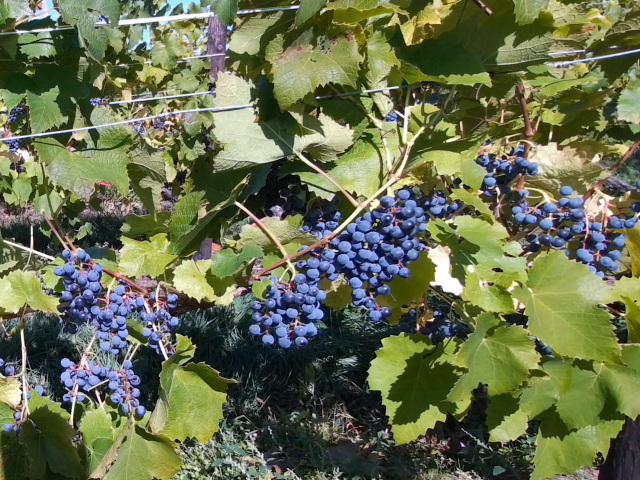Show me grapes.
<instances>
[{"label":"grapes","mask_w":640,"mask_h":480,"mask_svg":"<svg viewBox=\"0 0 640 480\" xmlns=\"http://www.w3.org/2000/svg\"><path fill=\"white\" fill-rule=\"evenodd\" d=\"M60 365L65 370L60 374V379L63 381L62 387L64 389H71L74 386V381L79 387H82L84 391L90 390L94 385L101 382V378L109 380L107 388L112 390L110 394V402L112 404H120L121 409L125 414L130 412L128 404L125 402L126 391L122 387L124 381L119 379L117 372H112V369L108 366H100L92 361L87 363L88 369L91 371L88 373L84 368L75 370V363L68 357H62L60 359Z\"/></svg>","instance_id":"84f90ec7"},{"label":"grapes","mask_w":640,"mask_h":480,"mask_svg":"<svg viewBox=\"0 0 640 480\" xmlns=\"http://www.w3.org/2000/svg\"><path fill=\"white\" fill-rule=\"evenodd\" d=\"M589 239L594 243V249L601 251L598 253L599 265L603 268H607L609 271H617L618 263L616 260L622 258V253L619 249L609 250L610 244L605 243L607 241V235L601 233L603 224L601 222L591 223L588 222Z\"/></svg>","instance_id":"83cd7487"},{"label":"grapes","mask_w":640,"mask_h":480,"mask_svg":"<svg viewBox=\"0 0 640 480\" xmlns=\"http://www.w3.org/2000/svg\"><path fill=\"white\" fill-rule=\"evenodd\" d=\"M460 329L459 323H454L453 325H441L437 327L436 335H443L444 337H451L458 333Z\"/></svg>","instance_id":"91a60905"},{"label":"grapes","mask_w":640,"mask_h":480,"mask_svg":"<svg viewBox=\"0 0 640 480\" xmlns=\"http://www.w3.org/2000/svg\"><path fill=\"white\" fill-rule=\"evenodd\" d=\"M13 428L16 434H20L22 432L21 426L19 424H16L15 426L10 422H5L3 424V431L5 433H10L13 430Z\"/></svg>","instance_id":"dcf779d0"},{"label":"grapes","mask_w":640,"mask_h":480,"mask_svg":"<svg viewBox=\"0 0 640 480\" xmlns=\"http://www.w3.org/2000/svg\"><path fill=\"white\" fill-rule=\"evenodd\" d=\"M142 335L146 338H150V347L155 350L158 355H162L163 351L159 348L158 341L160 340V333L153 331L152 328H144Z\"/></svg>","instance_id":"54f908b8"},{"label":"grapes","mask_w":640,"mask_h":480,"mask_svg":"<svg viewBox=\"0 0 640 480\" xmlns=\"http://www.w3.org/2000/svg\"><path fill=\"white\" fill-rule=\"evenodd\" d=\"M62 256L67 261L63 266H55L53 273L64 279L62 299L69 302L67 314L71 318H78L79 320L90 321L92 319V326L101 328V330L95 332V337L98 340L108 339L109 330L118 331L112 338V348L110 340L101 343L103 351L110 350L112 355H118L120 349L127 346V341L122 340L128 336V329L126 328L127 313L137 311L142 322H156L157 319L165 321L166 324H162L159 330L167 333H170L172 328H177L181 323L179 317L172 316L168 312L169 309L175 310L177 308V302L180 301L177 293H168L166 295V306L158 307L156 313H147L144 297H135L130 294L126 299V303L123 302L122 296L125 294V289L128 288V283L120 279H118L120 285L116 286L114 293L109 296V307L102 311L100 306L96 304L98 302L96 294L102 291L101 283L98 280L103 272V266L100 263H95L91 266V269L80 274V271L75 268V255L69 249H64ZM80 286L84 288L82 290L83 294L73 297L72 292H77Z\"/></svg>","instance_id":"b958b902"},{"label":"grapes","mask_w":640,"mask_h":480,"mask_svg":"<svg viewBox=\"0 0 640 480\" xmlns=\"http://www.w3.org/2000/svg\"><path fill=\"white\" fill-rule=\"evenodd\" d=\"M140 395L141 389L139 387H135L131 391L129 400L131 402V406L135 408V414L139 417H143L146 414V408L142 404H140V401L137 399Z\"/></svg>","instance_id":"ef6de9ee"},{"label":"grapes","mask_w":640,"mask_h":480,"mask_svg":"<svg viewBox=\"0 0 640 480\" xmlns=\"http://www.w3.org/2000/svg\"><path fill=\"white\" fill-rule=\"evenodd\" d=\"M584 204L582 197H574L573 199L561 198L556 203H544L542 207H538L535 213H527L529 203L527 201H518L517 206L511 208V214L514 215L515 223L525 222L532 224L538 222L541 230H548L553 227H559L556 235L558 238L548 235L527 234L525 240L528 243V250L537 253L541 250V243L544 246H552L554 248L564 247L566 243L573 240V234H582L586 223L585 210L579 208Z\"/></svg>","instance_id":"0513c4c2"},{"label":"grapes","mask_w":640,"mask_h":480,"mask_svg":"<svg viewBox=\"0 0 640 480\" xmlns=\"http://www.w3.org/2000/svg\"><path fill=\"white\" fill-rule=\"evenodd\" d=\"M340 201L338 195L329 202L322 203L321 209L316 208L310 211V221H303L300 229L311 233L317 239H322L333 232L338 227V221L342 218V211L336 210V203Z\"/></svg>","instance_id":"5460f4e3"},{"label":"grapes","mask_w":640,"mask_h":480,"mask_svg":"<svg viewBox=\"0 0 640 480\" xmlns=\"http://www.w3.org/2000/svg\"><path fill=\"white\" fill-rule=\"evenodd\" d=\"M525 148V144H520L518 148H515L512 151L513 156H518L514 159V165L507 159L492 160V158L487 154L476 157V163L479 166L484 167L487 172L483 177V183L486 187L484 189V195L486 197L494 195V191L489 188L494 185L501 186L500 192L504 195H509L510 187L505 185L511 182L512 179L516 178L519 173L526 174L528 172L530 175H537L539 173V164L529 162L524 157Z\"/></svg>","instance_id":"f8a65327"},{"label":"grapes","mask_w":640,"mask_h":480,"mask_svg":"<svg viewBox=\"0 0 640 480\" xmlns=\"http://www.w3.org/2000/svg\"><path fill=\"white\" fill-rule=\"evenodd\" d=\"M397 197L403 200V205L395 212V215L387 208L396 204V199L388 194L380 197V205L383 208L373 212H364L362 217L354 220L346 226V231L339 232L331 241L329 248L315 247L304 253V256L318 253L317 257H310L308 261L297 260L295 267L306 270L305 275L298 273L294 277L295 292H289L288 285L279 282V277H269L270 284L266 287V299L264 306L274 309L270 316H263L260 310L263 308L261 301H253L251 308L252 321L258 324L249 326L251 335H261L263 327L275 325L273 334L278 338V345L282 349H290L292 340L290 330L286 324L293 323L299 316L296 307L288 304H302L300 321L304 325H296L294 339L296 348H306L308 339L305 337L316 336L318 327L314 321H320L325 317V312L320 308V301L326 299V292L319 289L321 282L320 272H325L327 281L338 279V270L344 274V279L353 289L351 292L352 304L355 307H365L367 317L372 321H380L382 317H389L391 309L388 306L375 308V300L367 296V291L361 289L364 281L376 288L378 295H388L390 287L384 283H390L394 276L408 279L411 270L407 267L410 261H418L420 252L427 248L425 241H419L416 237L419 232H424L427 226L425 208H429L431 215H440L443 212L458 211L461 204L451 202L447 204L445 191L436 189L431 197L421 199V205L411 195L409 188H400ZM272 334H264L261 343L264 346H273L275 338Z\"/></svg>","instance_id":"01657485"},{"label":"grapes","mask_w":640,"mask_h":480,"mask_svg":"<svg viewBox=\"0 0 640 480\" xmlns=\"http://www.w3.org/2000/svg\"><path fill=\"white\" fill-rule=\"evenodd\" d=\"M575 257L583 261L589 271H593L596 276L604 278L606 276L605 271H598V267L593 263L594 255L591 253V249L588 247H577L575 250Z\"/></svg>","instance_id":"e5b3c951"},{"label":"grapes","mask_w":640,"mask_h":480,"mask_svg":"<svg viewBox=\"0 0 640 480\" xmlns=\"http://www.w3.org/2000/svg\"><path fill=\"white\" fill-rule=\"evenodd\" d=\"M123 367L126 369L124 371V378L131 386H139L141 384V378L137 375H134L133 363L131 361L124 360L122 362Z\"/></svg>","instance_id":"1ff8f66d"},{"label":"grapes","mask_w":640,"mask_h":480,"mask_svg":"<svg viewBox=\"0 0 640 480\" xmlns=\"http://www.w3.org/2000/svg\"><path fill=\"white\" fill-rule=\"evenodd\" d=\"M607 223L609 229H632L638 223V218L635 215H630L623 219L613 214L611 218L607 220Z\"/></svg>","instance_id":"2adb6a1f"}]
</instances>
